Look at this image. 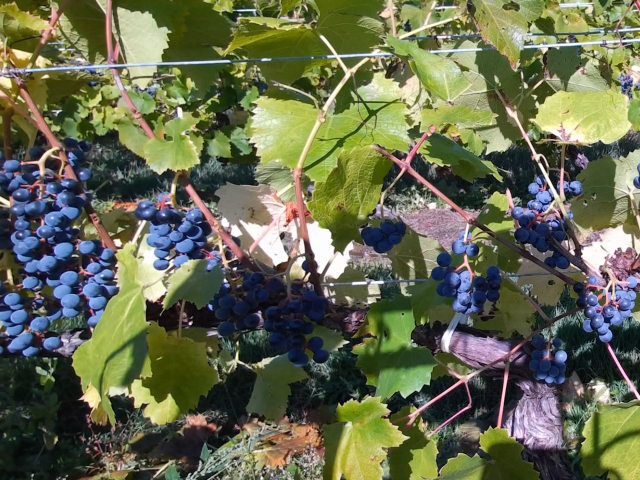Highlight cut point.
Instances as JSON below:
<instances>
[{"instance_id": "cut-point-2", "label": "cut point", "mask_w": 640, "mask_h": 480, "mask_svg": "<svg viewBox=\"0 0 640 480\" xmlns=\"http://www.w3.org/2000/svg\"><path fill=\"white\" fill-rule=\"evenodd\" d=\"M305 256H307V253H303V254H301V255H297L296 257H294V258L290 259V260L288 261V263H287V269H286V271H285V274H289L291 267L296 263V261H297L298 259H300V258L305 257Z\"/></svg>"}, {"instance_id": "cut-point-3", "label": "cut point", "mask_w": 640, "mask_h": 480, "mask_svg": "<svg viewBox=\"0 0 640 480\" xmlns=\"http://www.w3.org/2000/svg\"><path fill=\"white\" fill-rule=\"evenodd\" d=\"M470 226H471V222L467 220L466 224L464 226V230H465L464 236H463V243L464 244L468 243V238H469V235H470Z\"/></svg>"}, {"instance_id": "cut-point-4", "label": "cut point", "mask_w": 640, "mask_h": 480, "mask_svg": "<svg viewBox=\"0 0 640 480\" xmlns=\"http://www.w3.org/2000/svg\"><path fill=\"white\" fill-rule=\"evenodd\" d=\"M600 271H601V272H604V273H607V275L609 276V282H610V283H613V282H614V273L611 271V269H610V268H606V267H604V266H601V267H600Z\"/></svg>"}, {"instance_id": "cut-point-1", "label": "cut point", "mask_w": 640, "mask_h": 480, "mask_svg": "<svg viewBox=\"0 0 640 480\" xmlns=\"http://www.w3.org/2000/svg\"><path fill=\"white\" fill-rule=\"evenodd\" d=\"M54 152H56V150H55V149H53V148H49V149H47V150L42 154L41 158L39 159V167H40V168H43V167H44V162H45L46 158H47L50 154H52V153H54Z\"/></svg>"}]
</instances>
